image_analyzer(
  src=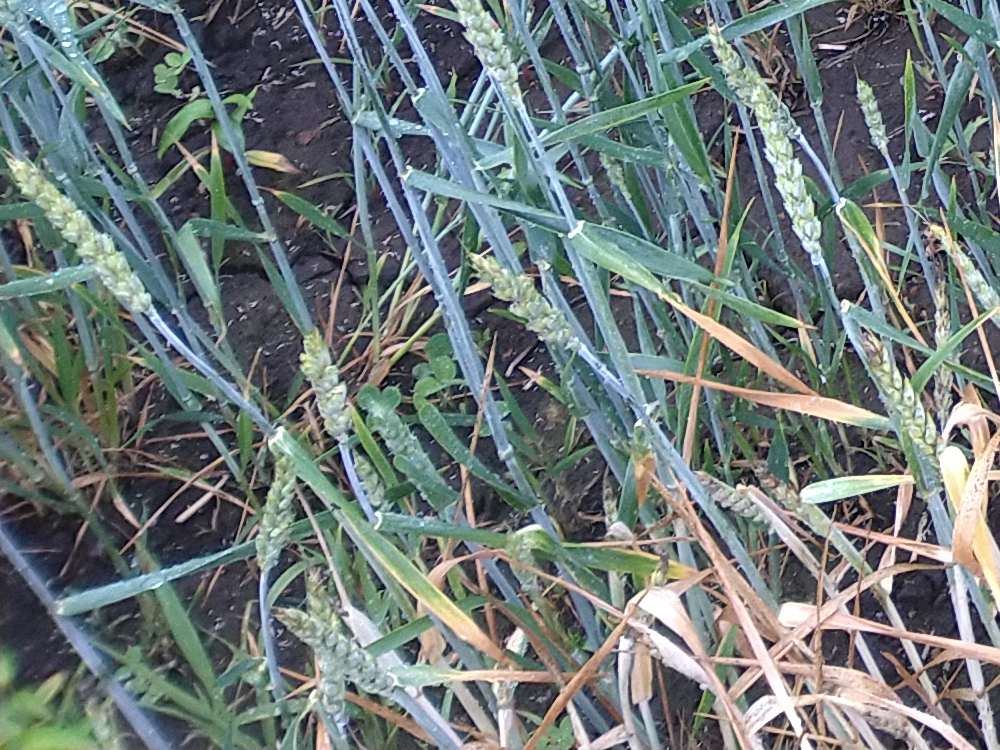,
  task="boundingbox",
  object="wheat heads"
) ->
[414,0,521,104]
[353,454,389,518]
[272,606,398,696]
[5,161,153,312]
[300,331,351,436]
[367,405,455,508]
[557,0,610,21]
[857,80,887,150]
[708,32,822,251]
[694,473,798,522]
[601,149,632,204]
[305,570,340,637]
[307,610,358,721]
[874,340,946,493]
[928,226,1000,343]
[469,254,579,356]
[934,290,953,416]
[258,454,298,566]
